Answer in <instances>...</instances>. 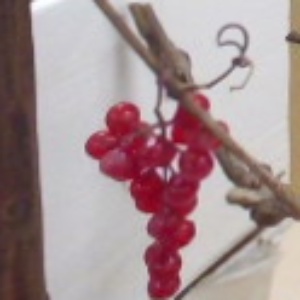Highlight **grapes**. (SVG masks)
Segmentation results:
<instances>
[{
  "mask_svg": "<svg viewBox=\"0 0 300 300\" xmlns=\"http://www.w3.org/2000/svg\"><path fill=\"white\" fill-rule=\"evenodd\" d=\"M136 105L119 101L107 108V129L85 142L88 157L101 160V170L118 180H130V192L142 214H150L147 233L155 238L143 260L151 275V300H168L179 289L181 249L195 235L187 221L198 205L199 182L214 169L208 150L224 145L203 120L178 104L172 123L149 128Z\"/></svg>",
  "mask_w": 300,
  "mask_h": 300,
  "instance_id": "obj_1",
  "label": "grapes"
},
{
  "mask_svg": "<svg viewBox=\"0 0 300 300\" xmlns=\"http://www.w3.org/2000/svg\"><path fill=\"white\" fill-rule=\"evenodd\" d=\"M195 100L204 112H210L212 110V103L209 97H206L202 93H198Z\"/></svg>",
  "mask_w": 300,
  "mask_h": 300,
  "instance_id": "obj_2",
  "label": "grapes"
}]
</instances>
